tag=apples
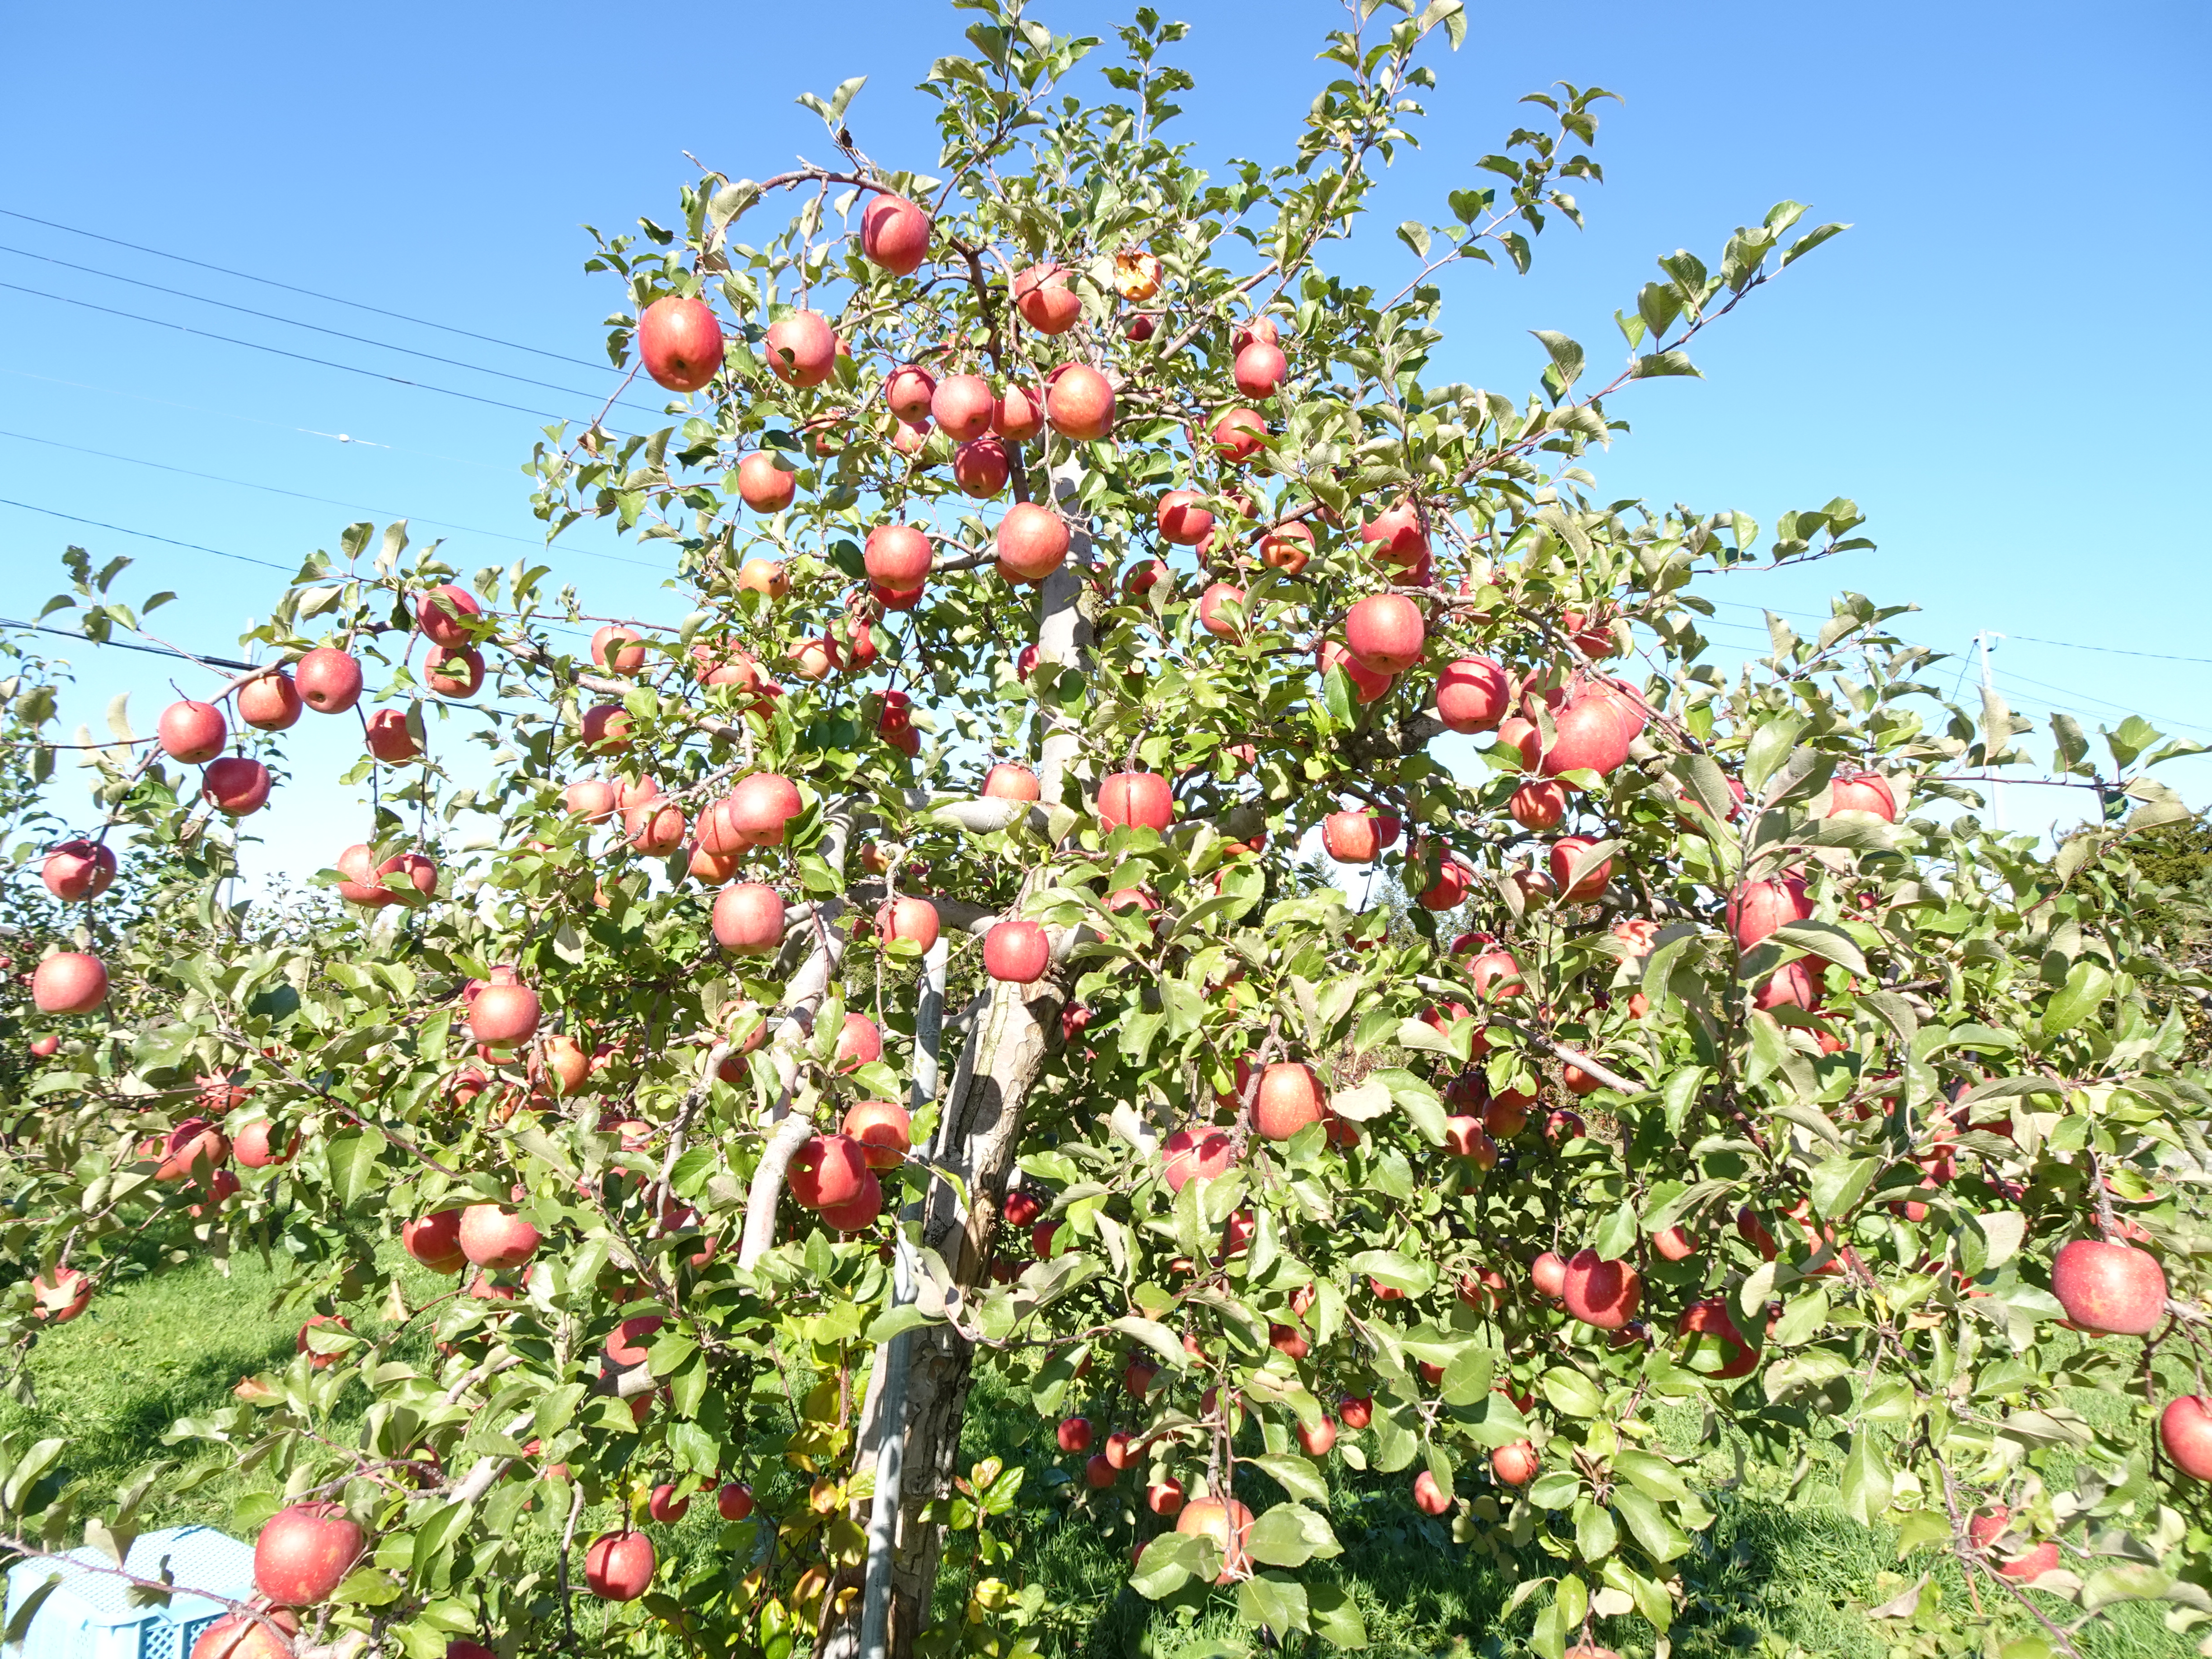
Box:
[508,1182,537,1206]
[1501,1380,1537,1422]
[393,851,438,906]
[1160,1125,1239,1199]
[1013,261,1083,334]
[1247,1061,1329,1143]
[460,1072,523,1132]
[1336,1387,1379,1430]
[695,799,755,856]
[815,1167,883,1233]
[827,333,854,379]
[0,953,11,972]
[1322,808,1382,864]
[1532,694,1632,791]
[432,1319,487,1367]
[1472,955,1526,1004]
[465,964,534,1020]
[360,1089,383,1108]
[1215,1048,1257,1112]
[580,702,635,758]
[1544,1105,1591,1153]
[603,1307,683,1377]
[845,584,885,631]
[656,1208,718,1271]
[32,951,108,1015]
[1489,1437,1542,1486]
[1110,1345,1150,1388]
[565,780,616,826]
[605,1121,656,1161]
[416,581,480,649]
[336,1111,367,1136]
[579,1012,605,1040]
[468,984,540,1049]
[1072,560,1114,603]
[849,910,885,952]
[1157,489,1212,546]
[685,1459,723,1492]
[1170,742,1211,779]
[885,415,933,454]
[158,701,226,763]
[1579,676,1645,742]
[712,882,784,955]
[1042,361,1117,441]
[1259,518,1314,577]
[1461,955,1498,995]
[1105,1430,1143,1470]
[865,572,926,611]
[574,1157,644,1218]
[1122,560,1175,615]
[1316,1108,1368,1148]
[1145,1420,1187,1458]
[1203,967,1259,1025]
[649,1482,691,1525]
[1548,836,1615,904]
[1804,1004,1856,1058]
[1340,646,1394,705]
[828,1013,881,1073]
[1677,771,1745,836]
[982,918,1051,983]
[1489,1060,1541,1114]
[459,1195,544,1270]
[436,1070,485,1112]
[1444,1071,1495,1122]
[1734,1201,1784,1253]
[1559,1641,1623,1659]
[1620,986,1670,1034]
[253,1500,366,1604]
[1508,782,1565,830]
[296,647,364,714]
[1314,493,1335,523]
[1002,1187,1044,1228]
[708,647,757,695]
[1779,1228,1855,1288]
[1404,834,1453,875]
[1216,1211,1280,1285]
[1056,1415,1094,1451]
[1536,1002,1575,1036]
[1652,1213,1703,1262]
[1357,804,1403,849]
[1410,860,1471,912]
[1195,524,1239,576]
[1212,866,1257,908]
[718,1481,754,1521]
[1199,582,1255,640]
[729,772,802,847]
[167,1117,229,1178]
[765,308,837,389]
[702,1056,746,1095]
[260,1041,288,1061]
[1564,1248,1643,1332]
[883,365,937,422]
[735,451,796,515]
[1436,1114,1499,1180]
[1216,484,1261,533]
[784,1133,866,1212]
[1086,1452,1118,1489]
[586,1093,615,1120]
[709,1000,767,1059]
[787,1561,865,1638]
[365,707,423,771]
[192,1063,257,1112]
[295,1312,357,1375]
[1560,594,1627,658]
[1071,318,1096,341]
[997,501,1070,574]
[1122,309,1167,347]
[1169,1254,1207,1298]
[839,1102,916,1170]
[1909,1117,1963,1158]
[1968,1504,2036,1562]
[1267,1274,1319,1317]
[1476,1372,1516,1413]
[1576,988,1616,1027]
[979,761,1040,814]
[1339,910,1393,955]
[824,616,879,672]
[779,1205,814,1248]
[1413,1469,1454,1514]
[873,721,921,760]
[1295,1411,1336,1457]
[1467,1027,1508,1067]
[401,1197,476,1263]
[235,670,300,730]
[1386,547,1436,593]
[987,1248,1021,1283]
[202,757,272,818]
[906,858,948,899]
[1956,1075,2017,1144]
[605,1050,643,1086]
[497,1435,576,1512]
[598,1366,657,1430]
[606,1283,671,1334]
[1755,1196,1826,1268]
[1233,341,1285,401]
[936,332,976,367]
[590,625,646,677]
[1122,1353,1160,1400]
[953,439,1012,499]
[1675,1295,1772,1383]
[2156,1393,2212,1483]
[1435,654,1511,736]
[1215,408,1266,464]
[1459,571,1515,624]
[1315,634,1355,678]
[1740,948,1811,1027]
[1227,1146,1248,1169]
[1482,1094,1529,1140]
[1922,1100,1972,1144]
[337,845,407,909]
[690,1030,723,1067]
[735,556,791,609]
[1018,644,1064,690]
[29,1034,64,1056]
[1610,918,1671,972]
[981,870,1002,887]
[786,634,833,682]
[472,1262,547,1340]
[1344,592,1425,676]
[1131,1539,1166,1575]
[134,1135,188,1183]
[694,636,746,688]
[1185,409,1224,454]
[1609,1319,1655,1362]
[1969,1274,2012,1313]
[624,798,684,858]
[185,1167,241,1220]
[359,1439,441,1507]
[1146,383,1175,417]
[1498,715,1557,776]
[1522,662,1582,717]
[859,832,918,882]
[1418,1001,1473,1046]
[1564,1058,1605,1095]
[931,374,996,444]
[877,1232,911,1268]
[585,1528,654,1604]
[232,1114,301,1170]
[1885,1167,1950,1236]
[1231,312,1280,359]
[864,524,934,589]
[1502,664,1546,701]
[689,834,738,885]
[1532,1250,1572,1305]
[594,877,632,910]
[1724,870,1820,962]
[1052,999,1101,1046]
[1085,1045,1111,1073]
[43,838,117,901]
[1199,1383,1250,1431]
[1110,246,1163,302]
[805,407,852,458]
[1265,1321,1313,1363]
[858,194,929,278]
[19,939,41,954]
[525,1085,579,1132]
[589,1055,620,1087]
[2048,1278,2111,1344]
[1921,1247,1972,1301]
[1783,951,1861,1030]
[1094,770,1174,843]
[1845,1074,1902,1123]
[615,1031,667,1067]
[425,642,485,699]
[995,547,1035,585]
[1368,1261,1410,1302]
[611,773,658,820]
[1032,1218,1088,1264]
[1219,812,1266,857]
[873,898,939,962]
[190,1605,307,1659]
[735,680,788,728]
[1183,1330,1231,1372]
[717,1235,748,1265]
[525,837,559,868]
[527,1034,591,1098]
[643,1171,706,1236]
[1989,1535,2061,1589]
[1828,878,1887,936]
[860,690,912,732]
[1445,1171,1484,1207]
[419,1227,473,1274]
[987,379,1047,441]
[1765,1302,1802,1345]
[1915,1149,1959,1188]
[1041,1338,1094,1379]
[1509,869,1557,914]
[425,1638,500,1659]
[1132,1364,1175,1401]
[1971,1181,2030,1239]
[1417,1345,1458,1387]
[478,1031,525,1062]
[1208,735,1259,775]
[2051,1239,2166,1332]
[2086,1173,2159,1241]
[1812,770,1899,833]
[527,1261,558,1294]
[26,1265,90,1324]
[138,1104,163,1129]
[1093,886,1157,955]
[1323,492,1362,532]
[1455,1266,1510,1316]
[1145,1474,1186,1515]
[1174,1495,1260,1586]
[1359,490,1430,568]
[1444,928,1503,990]
[637,296,724,394]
